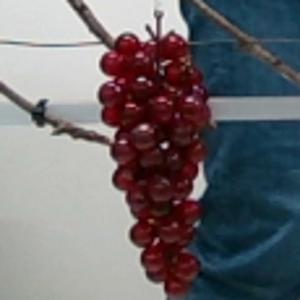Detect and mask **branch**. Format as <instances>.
Masks as SVG:
<instances>
[{
  "instance_id": "obj_1",
  "label": "branch",
  "mask_w": 300,
  "mask_h": 300,
  "mask_svg": "<svg viewBox=\"0 0 300 300\" xmlns=\"http://www.w3.org/2000/svg\"><path fill=\"white\" fill-rule=\"evenodd\" d=\"M0 95H3L11 103L17 106L31 117V123H34L36 129H45L50 126L52 131L49 133L50 137L70 136L73 141L84 140L100 144L102 146L110 147V144L115 139H110L108 135H102L95 130H85L83 127L74 125L72 122L67 121L60 117H54L48 113L47 104L50 102L49 98H39L33 104L29 99L17 93L10 88L7 83L0 79Z\"/></svg>"
},
{
  "instance_id": "obj_3",
  "label": "branch",
  "mask_w": 300,
  "mask_h": 300,
  "mask_svg": "<svg viewBox=\"0 0 300 300\" xmlns=\"http://www.w3.org/2000/svg\"><path fill=\"white\" fill-rule=\"evenodd\" d=\"M71 11L76 15L88 30V33L94 36L95 39L107 50H115L114 42L115 37L108 32L107 28L104 27L98 18L94 15L90 6L85 0H64Z\"/></svg>"
},
{
  "instance_id": "obj_2",
  "label": "branch",
  "mask_w": 300,
  "mask_h": 300,
  "mask_svg": "<svg viewBox=\"0 0 300 300\" xmlns=\"http://www.w3.org/2000/svg\"><path fill=\"white\" fill-rule=\"evenodd\" d=\"M198 10L210 19L222 32L230 36L245 52L261 60L269 69L281 74L286 80L300 87V72L271 52L247 30L234 24L225 15L211 6L206 0H189Z\"/></svg>"
}]
</instances>
